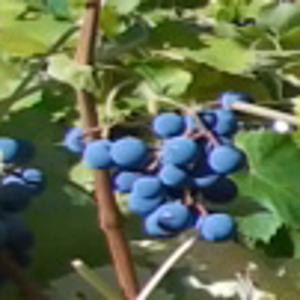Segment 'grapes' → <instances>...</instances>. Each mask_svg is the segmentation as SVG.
<instances>
[{
  "instance_id": "1",
  "label": "grapes",
  "mask_w": 300,
  "mask_h": 300,
  "mask_svg": "<svg viewBox=\"0 0 300 300\" xmlns=\"http://www.w3.org/2000/svg\"><path fill=\"white\" fill-rule=\"evenodd\" d=\"M218 105L157 113L151 130L163 144L156 149L133 134L88 143L78 127L66 131L65 147L83 156L89 169L114 171L113 194L128 198L127 210L140 220L144 235L171 239L194 226L202 242H227L237 234L236 218L210 210L236 199L237 186L229 178L248 168L249 156L233 146L231 136L241 126V114L254 110L255 99L246 90L224 89Z\"/></svg>"
},
{
  "instance_id": "2",
  "label": "grapes",
  "mask_w": 300,
  "mask_h": 300,
  "mask_svg": "<svg viewBox=\"0 0 300 300\" xmlns=\"http://www.w3.org/2000/svg\"><path fill=\"white\" fill-rule=\"evenodd\" d=\"M34 160L30 142L0 137V250L18 266L29 265L36 248V236L21 226V214L46 188L45 173L30 167Z\"/></svg>"
}]
</instances>
